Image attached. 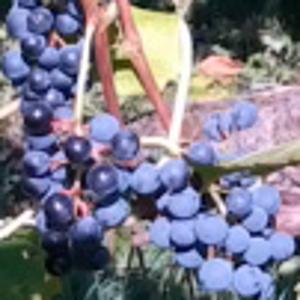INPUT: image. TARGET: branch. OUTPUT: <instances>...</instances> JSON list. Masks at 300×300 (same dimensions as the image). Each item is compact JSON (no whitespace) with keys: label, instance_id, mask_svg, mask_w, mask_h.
Masks as SVG:
<instances>
[{"label":"branch","instance_id":"branch-2","mask_svg":"<svg viewBox=\"0 0 300 300\" xmlns=\"http://www.w3.org/2000/svg\"><path fill=\"white\" fill-rule=\"evenodd\" d=\"M82 15L86 22L93 21L95 23L94 58L102 82L103 98L108 114L118 116L122 112V107L116 94L115 77L107 54L109 16L101 0H83Z\"/></svg>","mask_w":300,"mask_h":300},{"label":"branch","instance_id":"branch-1","mask_svg":"<svg viewBox=\"0 0 300 300\" xmlns=\"http://www.w3.org/2000/svg\"><path fill=\"white\" fill-rule=\"evenodd\" d=\"M115 6L121 20V29L123 34V41L127 48L125 57L127 63L138 74L142 82L147 96H150L153 101V106L158 112L161 125L165 128L166 133L169 134L170 114L166 111L163 104L162 97L155 86L154 78L151 76L150 66L146 59L144 50L141 45L135 24L131 22L133 13L128 0H115Z\"/></svg>","mask_w":300,"mask_h":300}]
</instances>
